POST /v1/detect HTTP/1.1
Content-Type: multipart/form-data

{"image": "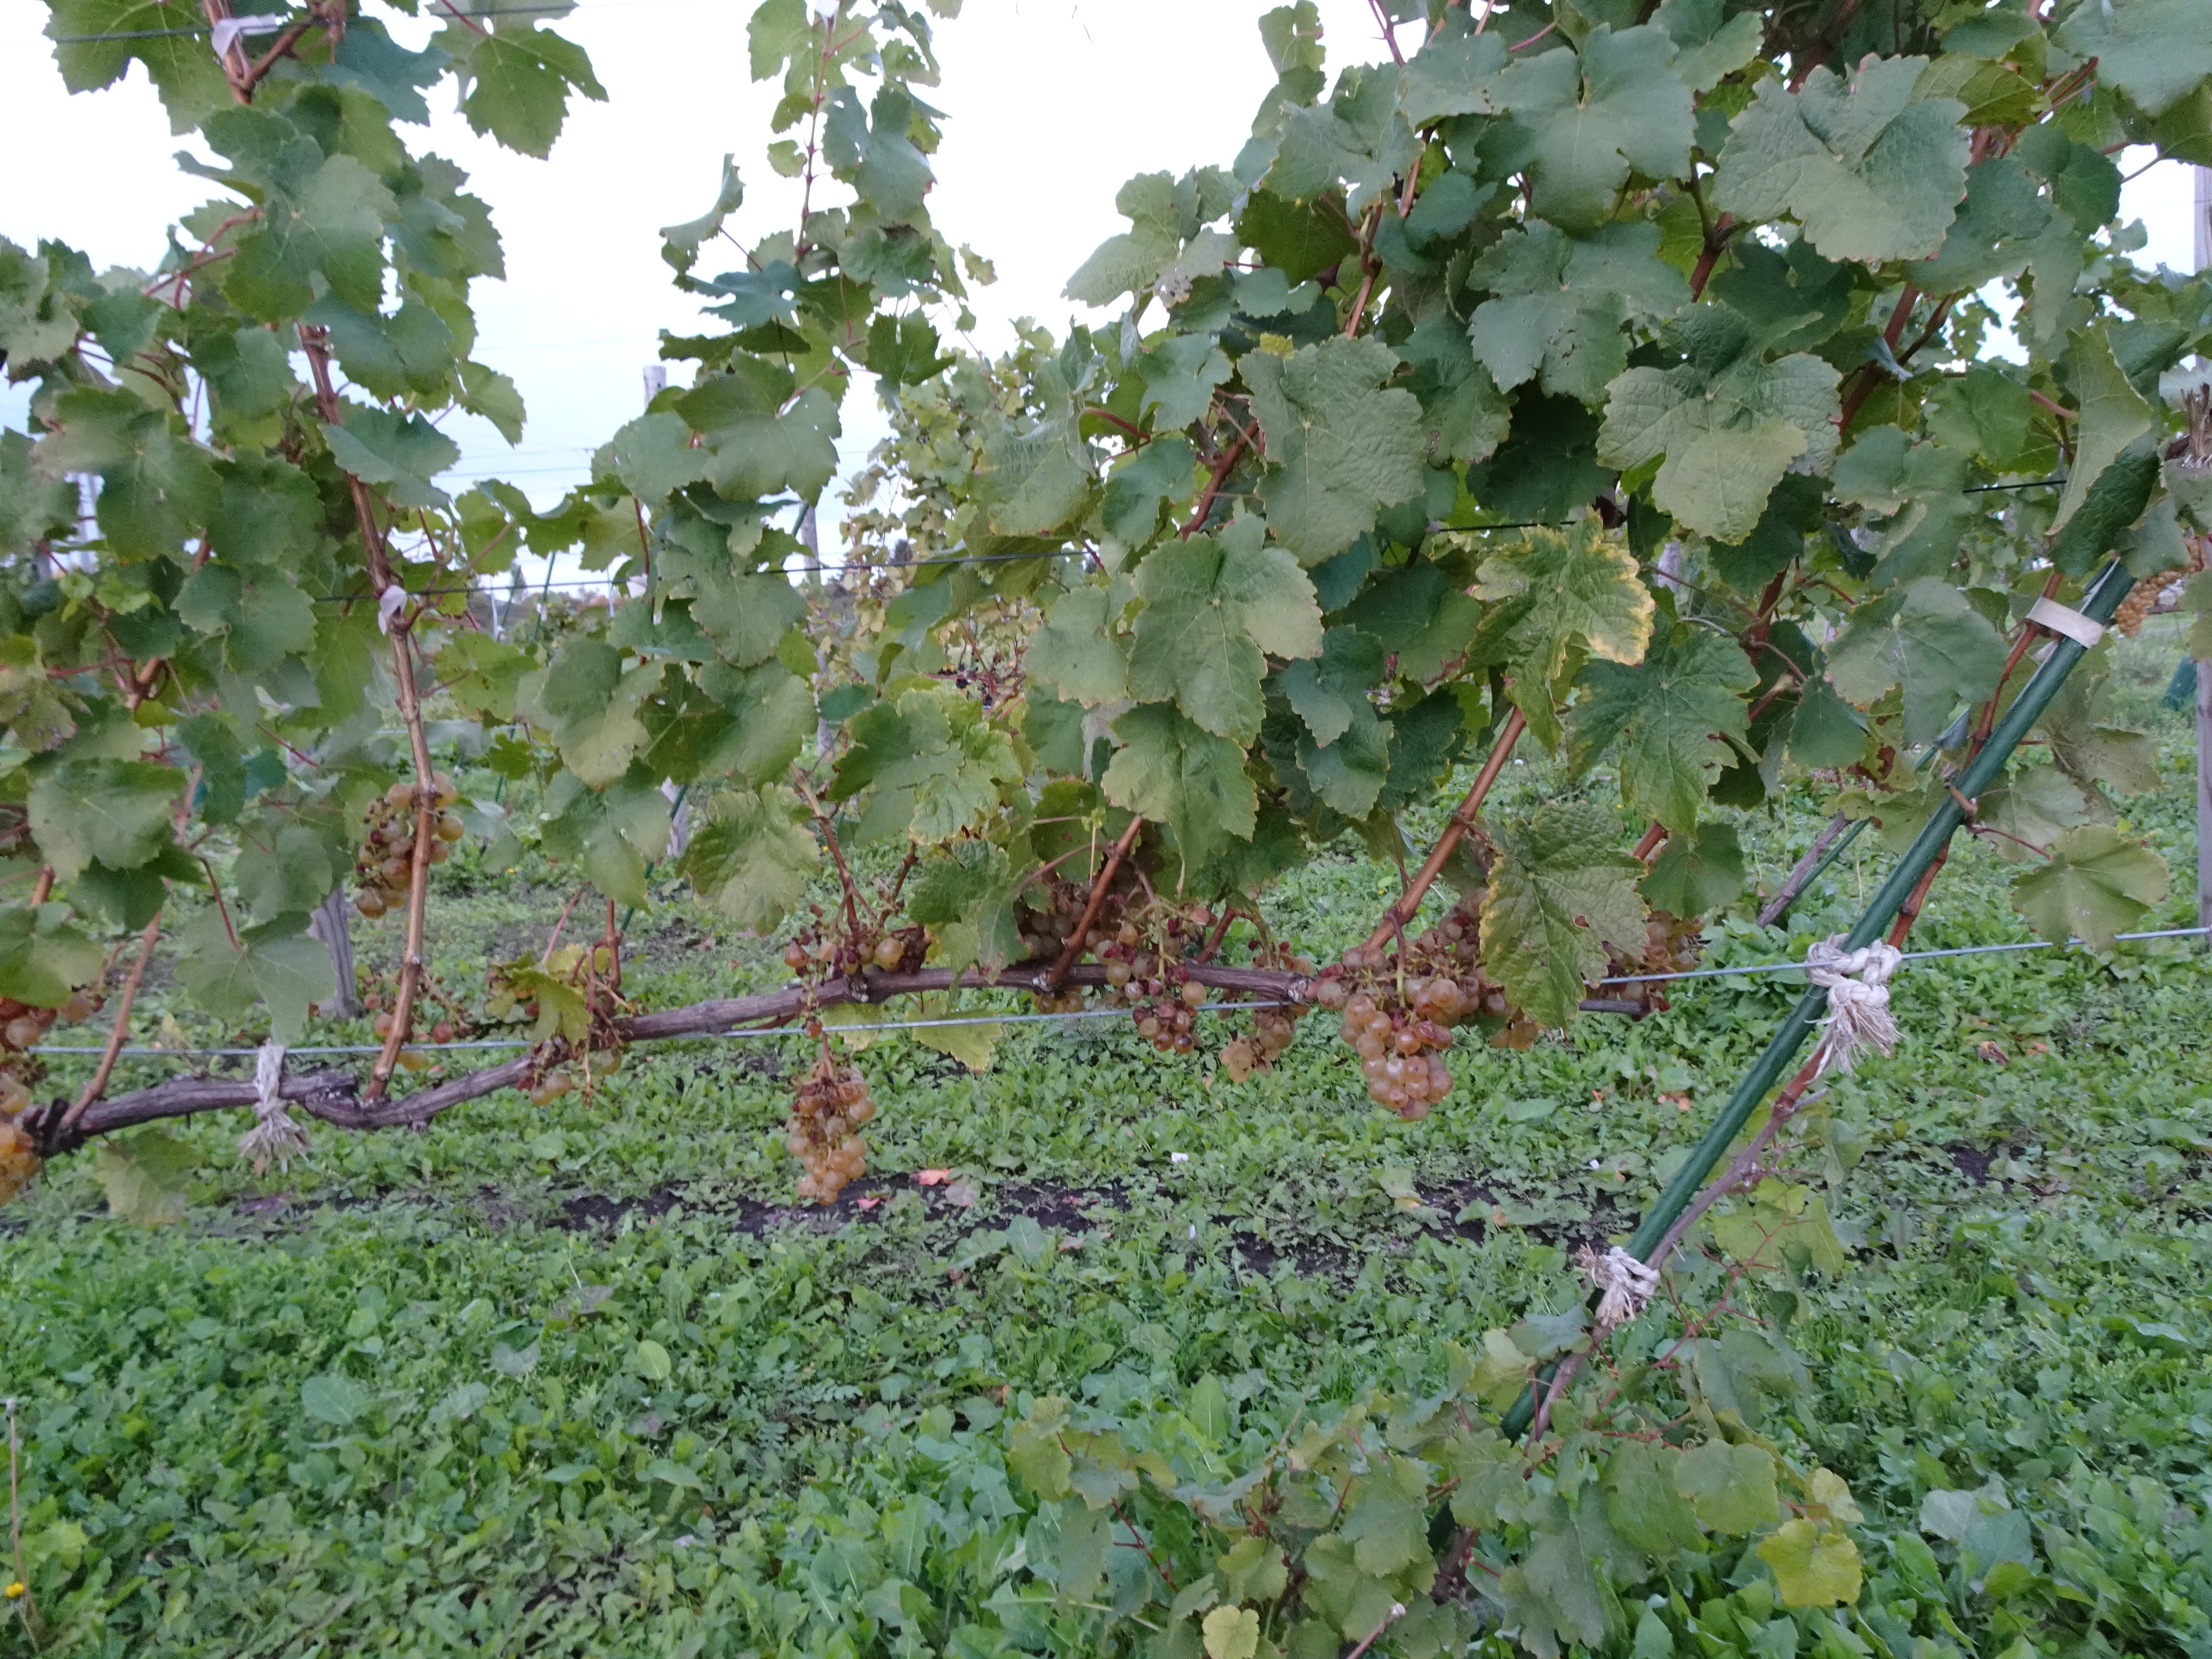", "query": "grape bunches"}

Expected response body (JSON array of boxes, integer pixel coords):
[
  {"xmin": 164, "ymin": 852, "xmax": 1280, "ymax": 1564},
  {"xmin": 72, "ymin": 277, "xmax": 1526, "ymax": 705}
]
[
  {"xmin": 780, "ymin": 936, "xmax": 909, "ymax": 1039},
  {"xmin": 353, "ymin": 773, "xmax": 464, "ymax": 918},
  {"xmin": 527, "ymin": 1049, "xmax": 619, "ymax": 1115},
  {"xmin": 1003, "ymin": 878, "xmax": 1110, "ymax": 1020},
  {"xmin": 1650, "ymin": 908, "xmax": 1706, "ymax": 973},
  {"xmin": 2113, "ymin": 564, "xmax": 2161, "ymax": 640},
  {"xmin": 2160, "ymin": 530, "xmax": 2208, "ymax": 584},
  {"xmin": 1342, "ymin": 976, "xmax": 1456, "ymax": 1122},
  {"xmin": 782, "ymin": 1066, "xmax": 875, "ymax": 1208},
  {"xmin": 1095, "ymin": 903, "xmax": 1219, "ymax": 1054},
  {"xmin": 1481, "ymin": 978, "xmax": 1545, "ymax": 1059},
  {"xmin": 1387, "ymin": 885, "xmax": 1502, "ymax": 1022},
  {"xmin": 1318, "ymin": 939, "xmax": 1397, "ymax": 1015},
  {"xmin": 1608, "ymin": 925, "xmax": 1672, "ymax": 1007},
  {"xmin": 0, "ymin": 1068, "xmax": 40, "ymax": 1186},
  {"xmin": 1, "ymin": 990, "xmax": 104, "ymax": 1050},
  {"xmin": 1217, "ymin": 945, "xmax": 1316, "ymax": 1084},
  {"xmin": 363, "ymin": 985, "xmax": 456, "ymax": 1075}
]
